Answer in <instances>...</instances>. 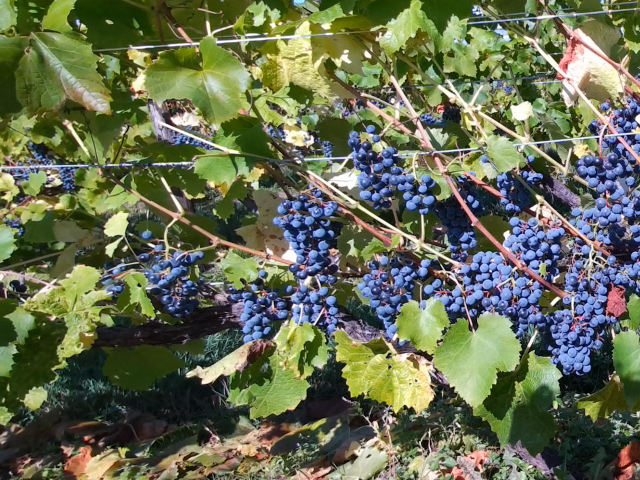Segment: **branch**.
<instances>
[{"instance_id":"30e6481e","label":"branch","mask_w":640,"mask_h":480,"mask_svg":"<svg viewBox=\"0 0 640 480\" xmlns=\"http://www.w3.org/2000/svg\"><path fill=\"white\" fill-rule=\"evenodd\" d=\"M159 125L164 127V128H167L168 130H171L172 132H175V133L180 134L182 136L189 137L190 139H192V140H194V141H196L198 143L204 144L205 146L221 150L222 152H226V153L237 155V156L247 157V158L263 159V160L271 161L274 164H281V165H284L286 167L294 168V169L300 170L302 172H305V173H307L308 175H310V176H312L314 178L312 180V183L315 186H317L319 189H321L324 193H326L331 200H334L336 198V195L341 197V198H343V199H345L354 208H356V209H358V210H360L362 212H365L366 214H368L369 216H371L375 220L379 221L382 225H384L386 228H389L390 230H392L396 234L401 235L402 237L410 240L413 244H416L417 246H419L420 248L424 249L425 251H427L429 253H432L433 255L437 256L439 259H442L444 261H447L448 263L453 264L456 268L460 267V263L458 261H456L455 259H453V258H451L449 256H446L444 254H441L436 249H434L432 247H429L425 243H423V242L419 241L418 239L414 238L409 233H406L404 230H400L399 228L395 227L391 223L387 222L385 219H383L381 216H379L378 214L373 212L371 209H368L367 207H364L362 204H359V203L355 202L350 196H348L344 192L339 191L332 184L327 182L326 179L321 177L318 173L310 170L307 167H304V166L300 165V162L291 163V162H288V161H286L284 159H276L274 156H269V155H265V154H258V153H249V152H244V151H239V150H236V149L224 147L223 145L212 143L210 141H207L204 138L196 136L195 134H192L189 131H185V130L179 129L177 127H174L173 125H171V124H169V123H167V122H165L163 120L159 121Z\"/></svg>"},{"instance_id":"325d2c04","label":"branch","mask_w":640,"mask_h":480,"mask_svg":"<svg viewBox=\"0 0 640 480\" xmlns=\"http://www.w3.org/2000/svg\"><path fill=\"white\" fill-rule=\"evenodd\" d=\"M102 174L106 178H108L113 184L119 187L122 191L126 192L131 197L141 202L143 205L156 208L159 212H162L167 216L173 217L176 221L183 223L186 227L199 232L200 234L205 236L207 239L213 241L214 243L221 244L223 246H226L227 248L234 249L238 252H241L251 257L275 261L284 265H290L292 263V260L290 258L273 254V253L253 250V249L247 248L246 246L240 245L236 242L228 241L226 238L217 236L214 233H211L209 230H207L203 226L190 221L188 218H185L183 215H180L176 210L169 209L164 205H162L160 202L146 198L142 194L138 193L136 190L132 189L130 186L124 184L120 179H118L114 174H112L108 168H103Z\"/></svg>"},{"instance_id":"170604dd","label":"branch","mask_w":640,"mask_h":480,"mask_svg":"<svg viewBox=\"0 0 640 480\" xmlns=\"http://www.w3.org/2000/svg\"><path fill=\"white\" fill-rule=\"evenodd\" d=\"M417 37L419 38V41L421 43L422 48L424 49V51L426 52L427 57L430 59V61L432 63H434L438 69L440 70L443 78L446 80V82L448 83V85L452 88V90L455 92V95H453L449 90H447L442 84H440L438 81H436L435 79L431 78L430 76H428L424 71H422L420 69V67L418 65H416L415 63H413L412 61H410L408 58H406L401 52H397L396 56L403 61L406 65H408L409 67H411L412 69H414L418 75L422 76L426 81H428L429 83L433 84L436 88H438L441 92H443L445 95H447L448 98H450L449 103L450 104H454L455 102L461 104L462 106H465L466 109L469 111L470 115L473 117L474 122L477 124L478 128L480 129V132L483 136L484 139H488L489 135L484 127V125L482 124V122L480 121L479 117L477 114H479L482 118L488 120L490 123H492L493 125L499 127L500 129H502L503 131L507 132L510 136H512L513 138L520 140L521 142H523L525 144L526 141H528L526 138H524L522 135L514 132L513 130H511L509 127L505 126L504 124H502L501 122L495 120L493 117H491L490 115H488L487 113H484L483 110H481L480 108H476L474 106H472L467 100L466 98L463 96V94L461 93V91L457 88V86L453 83V81L451 80V78L448 76L446 69L444 68V66L442 65L441 62H439V60L433 56L431 50L429 49V47L427 46V43L425 41L424 35L422 33H418Z\"/></svg>"},{"instance_id":"45aa463d","label":"branch","mask_w":640,"mask_h":480,"mask_svg":"<svg viewBox=\"0 0 640 480\" xmlns=\"http://www.w3.org/2000/svg\"><path fill=\"white\" fill-rule=\"evenodd\" d=\"M358 43L360 44L361 47H363L365 50H367L373 56V58L381 65L382 68H384L386 73L389 75V78H390L393 86L395 87V90L400 95V97L402 98L404 104L406 105L407 110L409 111V114H410L412 120L414 121L416 127L418 128V130L420 132L421 137L418 136L416 133H414L408 127H406L403 124H401L398 120H396V119L392 118L391 116H389L387 113H385L383 110H381L377 105L373 104L368 99H366L359 91H357L355 88L349 86L341 78H339L337 75H335L331 71V69L329 67L325 68L326 73L334 81L339 83L344 89H346L347 91H349L350 93H352L356 97H358V99L360 101H362L368 107H370L375 112H377L385 120H387L390 123L394 124L397 128H399L403 132L407 133L414 140L418 141L426 150H434L433 145L430 143V140L428 139V136L426 135V132H425L423 126L421 125V123L419 121V118L416 116V113H415L411 103L409 102V99H408L407 95L400 88V85H399L397 79L395 78V75H394L393 71L391 70V68L388 66L387 63L384 62V60L382 58H380V56L368 44H366L364 42V40L362 38L358 39Z\"/></svg>"},{"instance_id":"982ccf7c","label":"branch","mask_w":640,"mask_h":480,"mask_svg":"<svg viewBox=\"0 0 640 480\" xmlns=\"http://www.w3.org/2000/svg\"><path fill=\"white\" fill-rule=\"evenodd\" d=\"M433 158L435 160V163H436L438 169L441 171L444 180L446 181V183L449 185V187L451 188V190L453 191V193L457 197V200L459 202V205H460L462 211L472 220L474 225L486 235V237L492 242V244L494 246H496L499 250L504 252L508 257H510L526 274H528L532 278H534L537 281H539L549 291H551L552 293L556 294L557 296H560V297H564L565 296V297L570 298L571 300H574L575 296L571 292H568L565 289H561V288L556 287L555 285H553L552 283H549L547 280H545L543 277H541L539 274L534 273L532 270L527 268L526 265L516 255H514L508 248H506L505 246L500 244L493 237V235L490 233V231L484 225H482L478 221V219L475 217V215L466 207L465 202H464V200L462 198V195H461L460 191L455 187V184L450 179L446 169L443 167V165H442V163L440 161V158L446 160L449 164H453L454 160L449 155H446L445 153L444 154L433 155Z\"/></svg>"},{"instance_id":"1ff4a987","label":"branch","mask_w":640,"mask_h":480,"mask_svg":"<svg viewBox=\"0 0 640 480\" xmlns=\"http://www.w3.org/2000/svg\"><path fill=\"white\" fill-rule=\"evenodd\" d=\"M513 26L522 34H524L534 45L535 47L538 49V51L540 52V54L546 59V61L553 66L555 69H557L558 73L564 77L569 83L570 85L573 87V89L577 92L578 96L583 99L587 105L591 108V110L596 114L598 120L600 121V123L610 132V133H616L617 131H615L612 126L610 124H608V122L605 120V118L602 116V113L598 110V108L595 106V104L592 102V100L587 97L581 90L580 87L576 84V82L573 80V78L566 73L561 66H559L549 55L548 53L544 50V48L541 46V44L526 30L524 29L519 23L514 22Z\"/></svg>"},{"instance_id":"ea751061","label":"branch","mask_w":640,"mask_h":480,"mask_svg":"<svg viewBox=\"0 0 640 480\" xmlns=\"http://www.w3.org/2000/svg\"><path fill=\"white\" fill-rule=\"evenodd\" d=\"M511 175L516 178L522 185L524 188H526L527 191H529L536 199H538L540 201V203L545 206L547 208V210L550 213H553L557 218H559L563 224L561 225V228L565 231H567L568 233H570L571 235H573L574 237H579L583 242H585L588 246H590L591 248L595 249L596 251H598L599 253L605 255V256H609L610 252L605 250L604 248H602L601 246L597 245L596 243H594L593 241H591L589 238L585 237L584 234H582L579 230H577L565 217L562 213H560L559 211H557L556 208H553L551 206V204L546 201L537 191H535L529 184L528 182L522 177L520 176L515 170L511 171Z\"/></svg>"},{"instance_id":"ca6c30ca","label":"branch","mask_w":640,"mask_h":480,"mask_svg":"<svg viewBox=\"0 0 640 480\" xmlns=\"http://www.w3.org/2000/svg\"><path fill=\"white\" fill-rule=\"evenodd\" d=\"M556 23L560 25V27L562 29H564L567 33H569L572 38L582 47H584L585 49H587L588 51H590L591 53H593L594 55L598 56L599 58H601L602 60L606 61L607 63L611 64V66L618 72H621L622 74L626 75L629 79H631L638 87H640V81L632 74L630 73L628 70L624 69L623 67L618 66V64L611 59L610 57L604 55L603 53H601L600 51H598L597 49H595L594 47H592L591 45H589L588 43L584 42L571 28H569L561 19H557Z\"/></svg>"},{"instance_id":"1d269e1b","label":"branch","mask_w":640,"mask_h":480,"mask_svg":"<svg viewBox=\"0 0 640 480\" xmlns=\"http://www.w3.org/2000/svg\"><path fill=\"white\" fill-rule=\"evenodd\" d=\"M339 211L345 216H347L348 218L352 219L355 223L359 224L361 227H363L365 230H367L371 235L379 239L381 242L387 244L388 246H391L393 244V240L391 238L387 237L386 235L382 234L380 231L376 230L372 225L367 223L365 220L359 217L356 213L347 209L345 206H341L339 208Z\"/></svg>"},{"instance_id":"1af6ec82","label":"branch","mask_w":640,"mask_h":480,"mask_svg":"<svg viewBox=\"0 0 640 480\" xmlns=\"http://www.w3.org/2000/svg\"><path fill=\"white\" fill-rule=\"evenodd\" d=\"M530 148L536 152L538 155L542 156L543 158H545L547 161H549L553 166L563 170L565 173H567L572 179H574L575 181H577L578 183H580L581 185H583L584 187L588 186V182L585 181L584 179H582L581 177H579L578 175H576L573 171H571L567 166L555 161L551 156H549L547 153H545L543 150H541L539 147L537 146H530Z\"/></svg>"},{"instance_id":"2b1400db","label":"branch","mask_w":640,"mask_h":480,"mask_svg":"<svg viewBox=\"0 0 640 480\" xmlns=\"http://www.w3.org/2000/svg\"><path fill=\"white\" fill-rule=\"evenodd\" d=\"M64 127L66 129L67 134L71 137L72 141L77 146L81 154L85 156L89 160V162H98V160L93 156V154L89 152L87 148L84 146V144L81 142L80 138L78 137L76 132L73 130V127L69 120H66L64 122Z\"/></svg>"},{"instance_id":"8bde2521","label":"branch","mask_w":640,"mask_h":480,"mask_svg":"<svg viewBox=\"0 0 640 480\" xmlns=\"http://www.w3.org/2000/svg\"><path fill=\"white\" fill-rule=\"evenodd\" d=\"M160 8L163 12V14L169 19V21L173 24V26L178 30V32L180 33V35L185 39L186 42L189 41H193L192 38L189 37V35L184 31V29L179 25V23L176 21V19L172 16L171 13L168 12L166 5L165 4H161Z\"/></svg>"},{"instance_id":"a944a4c4","label":"branch","mask_w":640,"mask_h":480,"mask_svg":"<svg viewBox=\"0 0 640 480\" xmlns=\"http://www.w3.org/2000/svg\"><path fill=\"white\" fill-rule=\"evenodd\" d=\"M464 174L469 178L472 179L473 181L477 182L479 185H481L482 187H484L485 189H487L491 194L497 196L500 199L504 198V194L501 193L498 190H495L493 187H491L488 183L484 182L483 180H481L479 177L475 176L474 174H471L468 170L464 171Z\"/></svg>"},{"instance_id":"afce2bb1","label":"branch","mask_w":640,"mask_h":480,"mask_svg":"<svg viewBox=\"0 0 640 480\" xmlns=\"http://www.w3.org/2000/svg\"><path fill=\"white\" fill-rule=\"evenodd\" d=\"M264 169L267 172H269L270 174L274 175L277 179L282 180L286 185L290 186L292 189L296 190L297 192L301 191V187L299 185H297L294 182H292L291 180H289L286 176L278 173L276 170L271 168L269 165H265Z\"/></svg>"},{"instance_id":"7c5c6f52","label":"branch","mask_w":640,"mask_h":480,"mask_svg":"<svg viewBox=\"0 0 640 480\" xmlns=\"http://www.w3.org/2000/svg\"><path fill=\"white\" fill-rule=\"evenodd\" d=\"M429 272L431 274H433L434 276L440 278L444 283H446L447 285H449L450 287H453L455 285V282L449 277L447 276L445 273H443L442 271L436 269L435 267H431L429 269Z\"/></svg>"},{"instance_id":"46de074c","label":"branch","mask_w":640,"mask_h":480,"mask_svg":"<svg viewBox=\"0 0 640 480\" xmlns=\"http://www.w3.org/2000/svg\"><path fill=\"white\" fill-rule=\"evenodd\" d=\"M617 141H618L619 143H621V144H622V145H623V146L628 150V152L631 154V156L633 157V159H634L638 164H640V158H639V156L636 154V152L634 151V149L632 148V146H631L627 141H625L622 137H618V138H617Z\"/></svg>"}]
</instances>
